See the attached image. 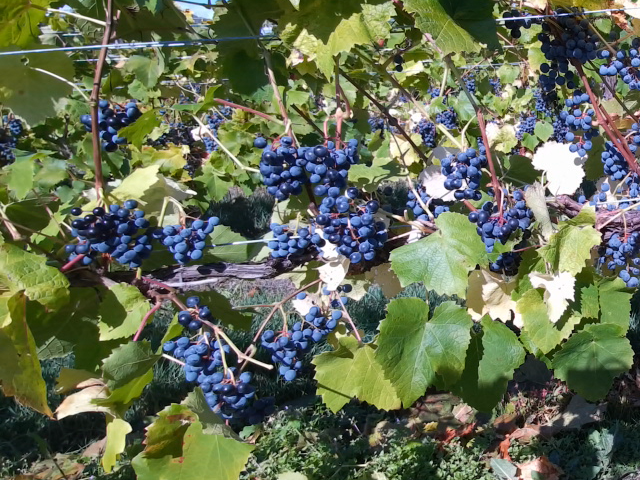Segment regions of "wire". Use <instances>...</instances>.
Instances as JSON below:
<instances>
[{
	"mask_svg": "<svg viewBox=\"0 0 640 480\" xmlns=\"http://www.w3.org/2000/svg\"><path fill=\"white\" fill-rule=\"evenodd\" d=\"M639 10H640L639 6H615V7H605L600 9L585 10V11L532 13V14H524V15L499 17L497 19V22L501 23V22L535 19V18H547V17L587 16V15L602 14V13H608V12L639 11Z\"/></svg>",
	"mask_w": 640,
	"mask_h": 480,
	"instance_id": "obj_2",
	"label": "wire"
},
{
	"mask_svg": "<svg viewBox=\"0 0 640 480\" xmlns=\"http://www.w3.org/2000/svg\"><path fill=\"white\" fill-rule=\"evenodd\" d=\"M640 200V195H636L633 197L621 198L617 200H609V201H598V206H611V205H619L624 203H630Z\"/></svg>",
	"mask_w": 640,
	"mask_h": 480,
	"instance_id": "obj_4",
	"label": "wire"
},
{
	"mask_svg": "<svg viewBox=\"0 0 640 480\" xmlns=\"http://www.w3.org/2000/svg\"><path fill=\"white\" fill-rule=\"evenodd\" d=\"M277 34H261V35H252V36H240V37H207L200 38L195 40H173L167 42H138V43H130V44H105V43H94L89 45H62V46H51L45 48H17L7 51H1L0 57L9 56L19 53H47L53 51H64V50H91L96 48H104V49H132V48H140V47H169L175 45H197L202 43L209 42H242V41H254V40H263V39H277Z\"/></svg>",
	"mask_w": 640,
	"mask_h": 480,
	"instance_id": "obj_1",
	"label": "wire"
},
{
	"mask_svg": "<svg viewBox=\"0 0 640 480\" xmlns=\"http://www.w3.org/2000/svg\"><path fill=\"white\" fill-rule=\"evenodd\" d=\"M276 237H266V238H257V239H248V240H234V241H226V242H218V243H207V248H220V247H228V246H236V245H250V244H259V243H268V242H276Z\"/></svg>",
	"mask_w": 640,
	"mask_h": 480,
	"instance_id": "obj_3",
	"label": "wire"
}]
</instances>
